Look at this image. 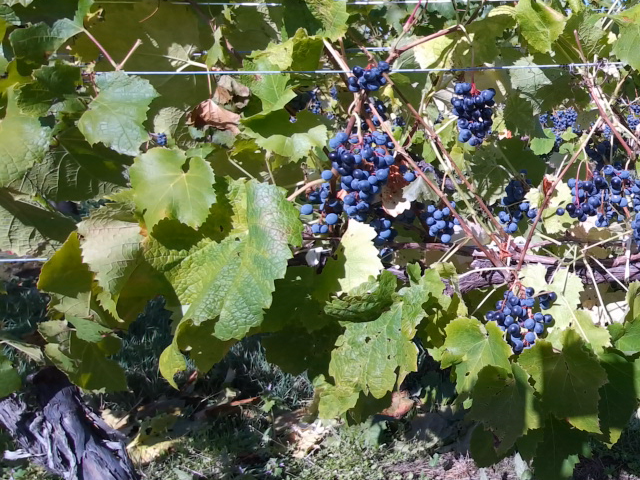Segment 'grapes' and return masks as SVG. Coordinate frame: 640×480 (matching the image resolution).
I'll use <instances>...</instances> for the list:
<instances>
[{
	"label": "grapes",
	"instance_id": "1",
	"mask_svg": "<svg viewBox=\"0 0 640 480\" xmlns=\"http://www.w3.org/2000/svg\"><path fill=\"white\" fill-rule=\"evenodd\" d=\"M348 141L346 133H336L333 139L329 141V147L334 150L328 153V158L332 162L339 174V189L346 191L348 194L341 201L339 199L327 198L330 195V183L333 175L330 169L320 172V177L324 182L320 185V190L312 191L308 199L310 201H320L318 209L323 211L325 208L333 209L335 212H327L325 214L326 224H312L310 232L312 234H325L329 231V226H335L338 223V214L345 213L348 218H354L358 222L366 220V212L370 209L368 200L372 194L381 192V185L387 183L389 166L396 163V159L392 154H387V150L394 147L388 140L385 132L381 134L379 130L371 131V134L362 138V148L358 150V154L350 152L348 148L343 147V143ZM363 160L373 163L371 175L369 170L363 168H354L355 165H362Z\"/></svg>",
	"mask_w": 640,
	"mask_h": 480
},
{
	"label": "grapes",
	"instance_id": "2",
	"mask_svg": "<svg viewBox=\"0 0 640 480\" xmlns=\"http://www.w3.org/2000/svg\"><path fill=\"white\" fill-rule=\"evenodd\" d=\"M623 166L619 160H616L614 164H605L602 167V172L605 175H610V186L608 181L600 175L598 170L592 172L591 180L577 181V196L579 197V204L576 205V178H567V187L571 190L572 203H568L562 207L556 209V214L562 216L568 213V217L578 222H585L590 217H596L594 225L597 228H607L611 225V221L615 219L617 224H620L625 216L623 214H616V211L610 206L616 204L619 208H626L628 206V200L621 196L622 182L627 181L632 184L631 187L626 188L624 193L626 195H632V201L634 205L632 209L634 211H640V180L633 178L628 170H622Z\"/></svg>",
	"mask_w": 640,
	"mask_h": 480
},
{
	"label": "grapes",
	"instance_id": "3",
	"mask_svg": "<svg viewBox=\"0 0 640 480\" xmlns=\"http://www.w3.org/2000/svg\"><path fill=\"white\" fill-rule=\"evenodd\" d=\"M524 294L527 299L518 298L514 296V291L511 289L506 290L503 293V299H499L494 303V308L499 311L489 310L486 314L487 321H497V326L502 328L503 331L508 332L511 342L515 345L513 351L520 353L524 348V341L521 337V327L533 332H527L525 334V341L530 346L536 345V335H541L544 332V325H548L552 322V315L541 312H535L532 314V319H528L526 308L533 307L536 300L532 298L535 294L533 287H527L524 289Z\"/></svg>",
	"mask_w": 640,
	"mask_h": 480
},
{
	"label": "grapes",
	"instance_id": "4",
	"mask_svg": "<svg viewBox=\"0 0 640 480\" xmlns=\"http://www.w3.org/2000/svg\"><path fill=\"white\" fill-rule=\"evenodd\" d=\"M470 82H456L454 92L456 95H463V99L452 96L450 104L453 106L451 112L457 117V125L460 128L458 140L471 146L481 145L486 139V134H491L493 110V97L497 90L489 87L480 90L478 95H471Z\"/></svg>",
	"mask_w": 640,
	"mask_h": 480
},
{
	"label": "grapes",
	"instance_id": "5",
	"mask_svg": "<svg viewBox=\"0 0 640 480\" xmlns=\"http://www.w3.org/2000/svg\"><path fill=\"white\" fill-rule=\"evenodd\" d=\"M451 213L447 207L437 208L434 204L426 206V212L420 214V218L428 228L430 237H437L442 244L450 243L453 240L455 225H459L458 220L453 217L445 220L444 217H450Z\"/></svg>",
	"mask_w": 640,
	"mask_h": 480
},
{
	"label": "grapes",
	"instance_id": "6",
	"mask_svg": "<svg viewBox=\"0 0 640 480\" xmlns=\"http://www.w3.org/2000/svg\"><path fill=\"white\" fill-rule=\"evenodd\" d=\"M388 69H390V64L386 60H380L378 65L369 71L361 65H354L352 67L354 76L347 79V89L350 92H360L362 89L377 92L381 86L387 84L382 77V72H387Z\"/></svg>",
	"mask_w": 640,
	"mask_h": 480
},
{
	"label": "grapes",
	"instance_id": "7",
	"mask_svg": "<svg viewBox=\"0 0 640 480\" xmlns=\"http://www.w3.org/2000/svg\"><path fill=\"white\" fill-rule=\"evenodd\" d=\"M537 209H530L529 202L518 203L516 210H511L510 215L506 210H500L498 212V219L501 224H506L504 226V232L509 234H515L519 230L518 223L524 219L523 212L526 214L527 218L533 222Z\"/></svg>",
	"mask_w": 640,
	"mask_h": 480
},
{
	"label": "grapes",
	"instance_id": "8",
	"mask_svg": "<svg viewBox=\"0 0 640 480\" xmlns=\"http://www.w3.org/2000/svg\"><path fill=\"white\" fill-rule=\"evenodd\" d=\"M369 226L374 229L378 235L374 238V243L377 246H383L388 242H392L398 235L396 229H392V220L387 217L376 218L369 222Z\"/></svg>",
	"mask_w": 640,
	"mask_h": 480
},
{
	"label": "grapes",
	"instance_id": "9",
	"mask_svg": "<svg viewBox=\"0 0 640 480\" xmlns=\"http://www.w3.org/2000/svg\"><path fill=\"white\" fill-rule=\"evenodd\" d=\"M505 192L507 193V197H503L501 199V204L503 206H508L511 203L519 202L525 197V189L523 187V183L520 180H510L505 186Z\"/></svg>",
	"mask_w": 640,
	"mask_h": 480
},
{
	"label": "grapes",
	"instance_id": "10",
	"mask_svg": "<svg viewBox=\"0 0 640 480\" xmlns=\"http://www.w3.org/2000/svg\"><path fill=\"white\" fill-rule=\"evenodd\" d=\"M558 294L556 292H546L544 295H539L538 307L542 311H546L550 307V301H556Z\"/></svg>",
	"mask_w": 640,
	"mask_h": 480
},
{
	"label": "grapes",
	"instance_id": "11",
	"mask_svg": "<svg viewBox=\"0 0 640 480\" xmlns=\"http://www.w3.org/2000/svg\"><path fill=\"white\" fill-rule=\"evenodd\" d=\"M398 170L401 173V177L405 179L406 182L411 183L416 179L417 173L414 170L412 172H408L406 165H399Z\"/></svg>",
	"mask_w": 640,
	"mask_h": 480
},
{
	"label": "grapes",
	"instance_id": "12",
	"mask_svg": "<svg viewBox=\"0 0 640 480\" xmlns=\"http://www.w3.org/2000/svg\"><path fill=\"white\" fill-rule=\"evenodd\" d=\"M373 106L377 108V111L380 113L381 117L386 121L387 116L384 113L387 111V107L384 105V103L380 100H376L373 103Z\"/></svg>",
	"mask_w": 640,
	"mask_h": 480
}]
</instances>
